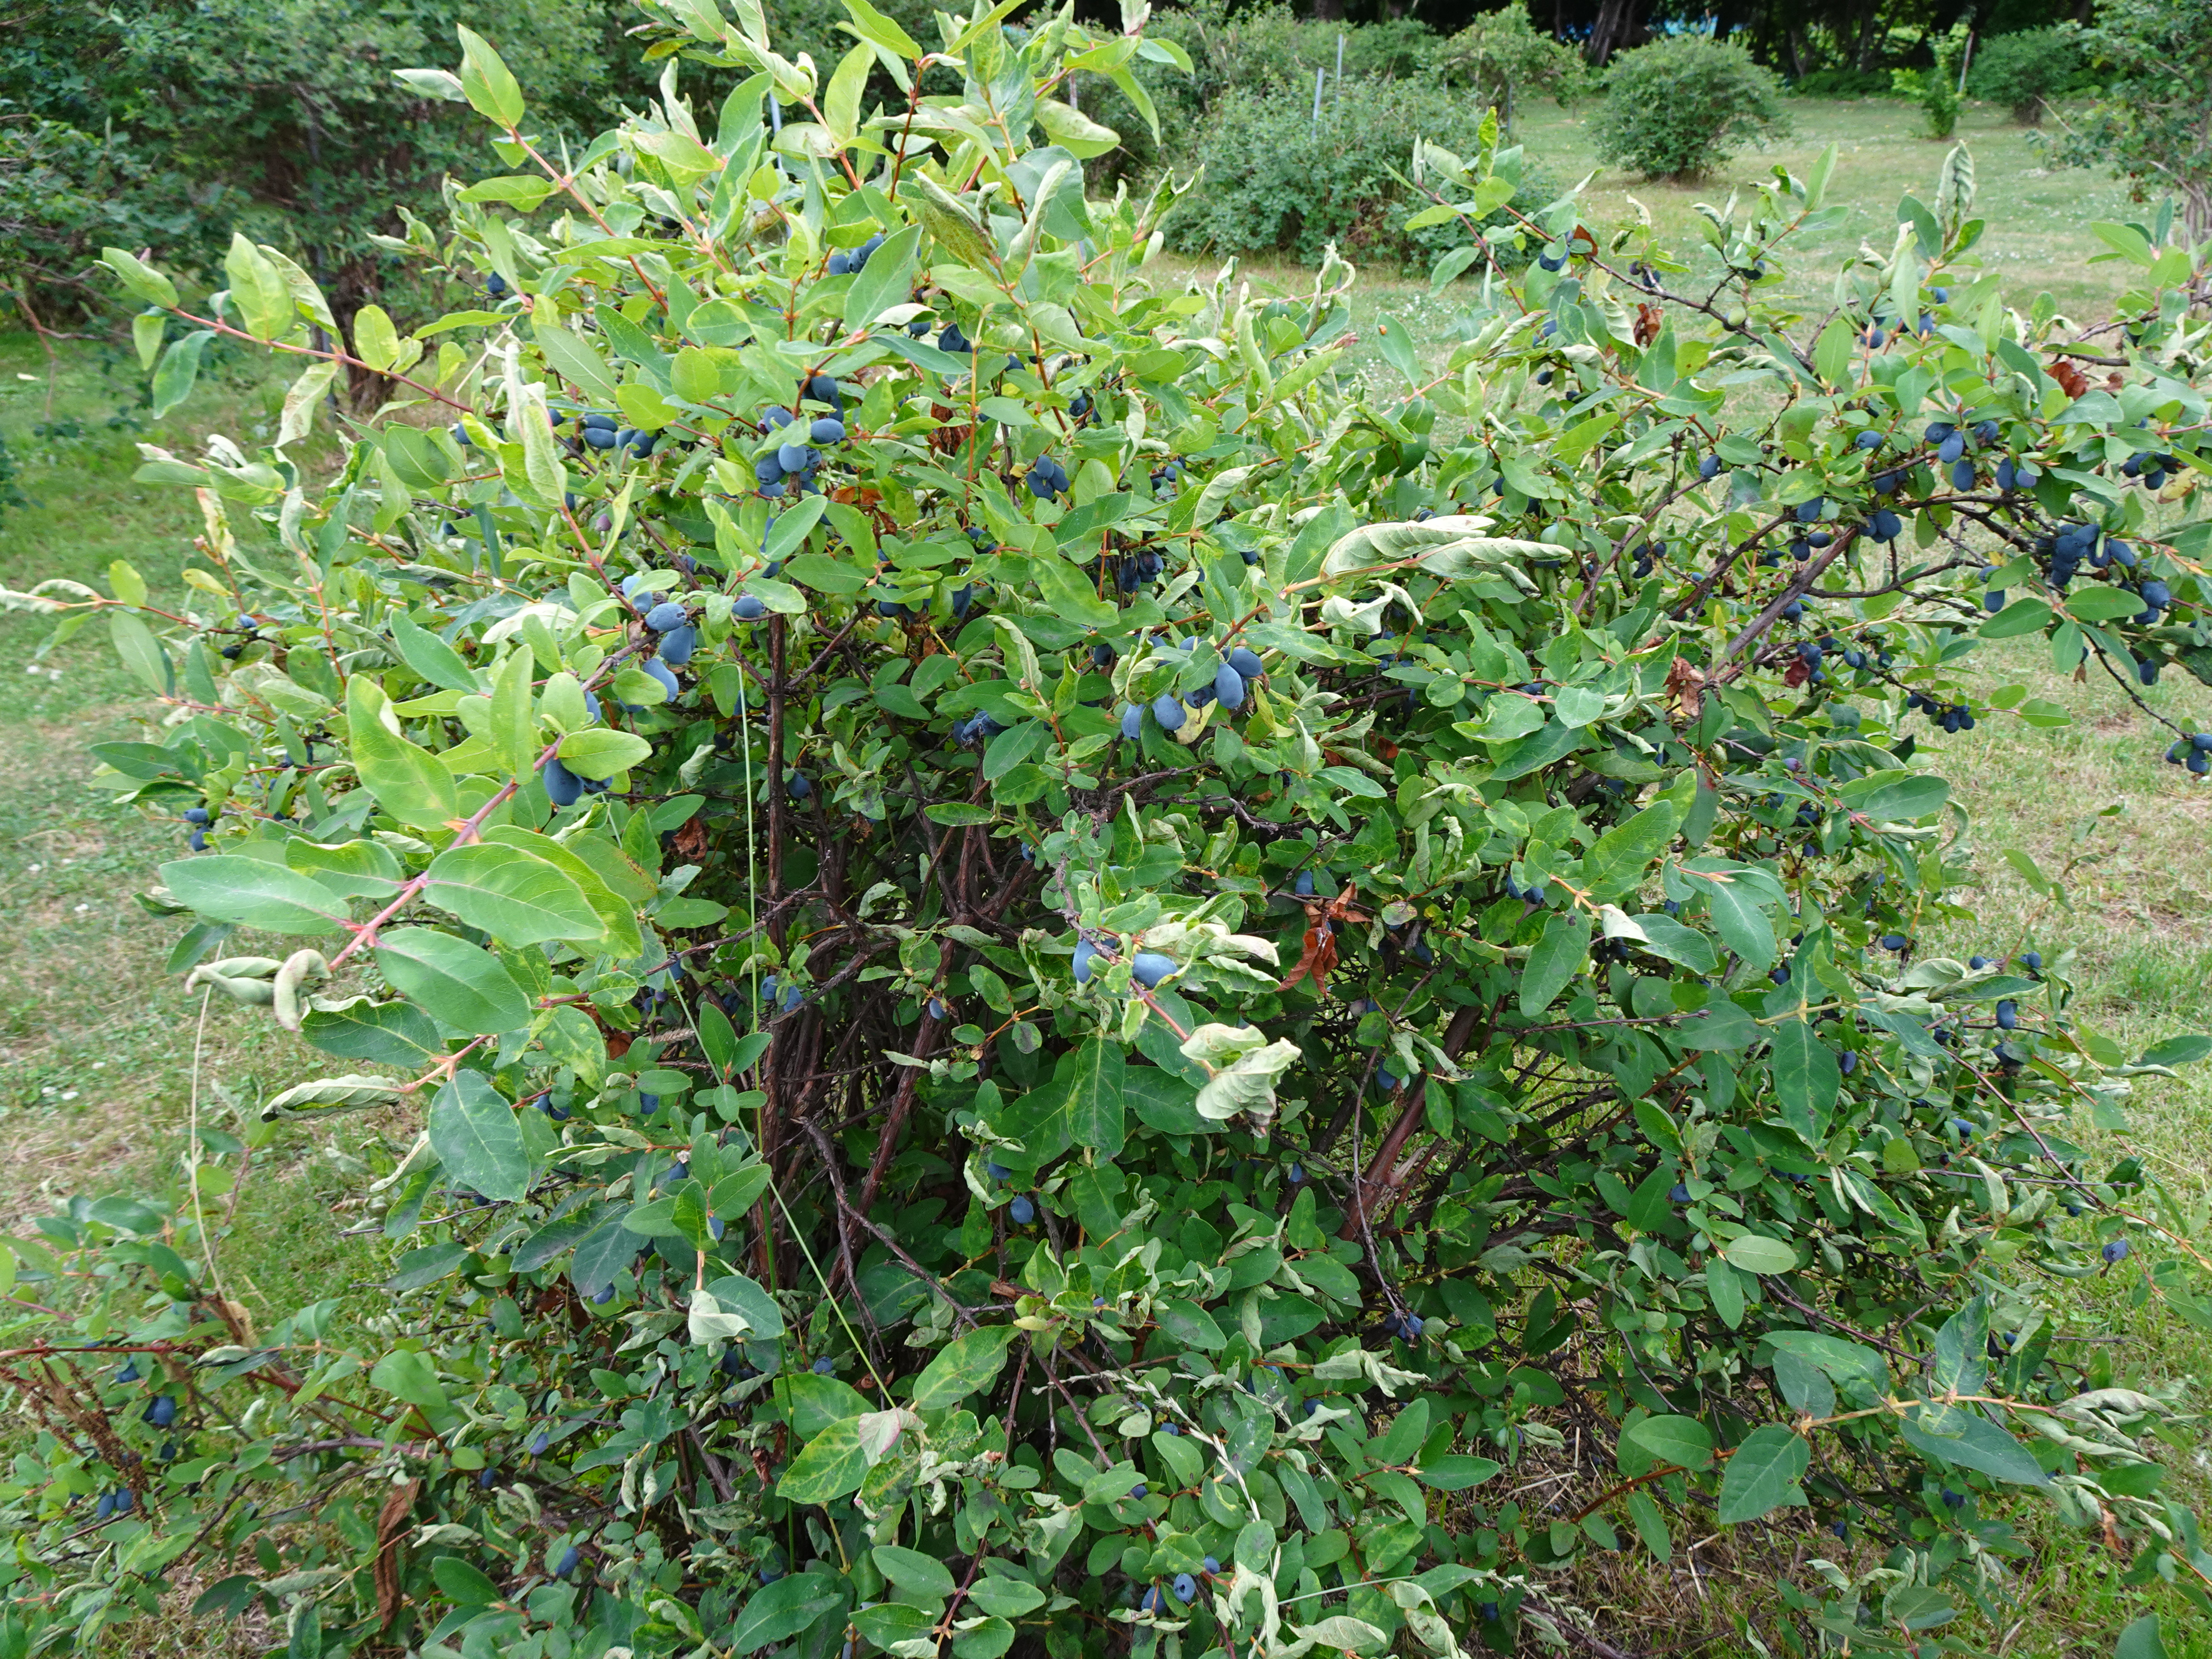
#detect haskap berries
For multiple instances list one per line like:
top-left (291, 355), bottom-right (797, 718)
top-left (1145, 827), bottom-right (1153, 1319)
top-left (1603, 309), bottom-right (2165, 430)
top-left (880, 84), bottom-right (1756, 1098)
top-left (1423, 636), bottom-right (1436, 644)
top-left (756, 453), bottom-right (786, 483)
top-left (1386, 653), bottom-right (1396, 660)
top-left (1539, 246), bottom-right (1570, 272)
top-left (2192, 733), bottom-right (2210, 749)
top-left (1606, 779), bottom-right (1625, 794)
top-left (916, 289), bottom-right (924, 302)
top-left (1691, 607), bottom-right (1707, 617)
top-left (1729, 306), bottom-right (1746, 324)
top-left (659, 318), bottom-right (663, 328)
top-left (2133, 418), bottom-right (2148, 429)
top-left (1798, 594), bottom-right (1814, 610)
top-left (1007, 356), bottom-right (1025, 372)
top-left (828, 398), bottom-right (846, 422)
top-left (1812, 671), bottom-right (1825, 680)
top-left (760, 517), bottom-right (777, 552)
top-left (2144, 468), bottom-right (2165, 490)
top-left (1524, 499), bottom-right (1538, 514)
top-left (708, 1217), bottom-right (724, 1239)
top-left (1181, 635), bottom-right (1202, 651)
top-left (2184, 645), bottom-right (2198, 654)
top-left (305, 744), bottom-right (314, 765)
top-left (1959, 714), bottom-right (1976, 730)
top-left (1366, 1000), bottom-right (1379, 1012)
top-left (1844, 648), bottom-right (1860, 667)
top-left (1548, 560), bottom-right (1560, 569)
top-left (1940, 1155), bottom-right (1949, 1165)
top-left (2055, 524), bottom-right (2079, 536)
top-left (660, 216), bottom-right (681, 228)
top-left (1384, 631), bottom-right (1396, 639)
top-left (621, 701), bottom-right (643, 714)
top-left (1942, 1490), bottom-right (1959, 1506)
top-left (1532, 336), bottom-right (1541, 346)
top-left (2089, 545), bottom-right (2108, 567)
top-left (722, 1350), bottom-right (739, 1375)
top-left (1094, 643), bottom-right (1116, 665)
top-left (1858, 519), bottom-right (1877, 536)
top-left (595, 514), bottom-right (611, 531)
top-left (799, 482), bottom-right (821, 497)
top-left (923, 993), bottom-right (953, 1022)
top-left (1855, 430), bottom-right (1883, 449)
top-left (1062, 360), bottom-right (1077, 370)
top-left (549, 1106), bottom-right (570, 1121)
top-left (1995, 1001), bottom-right (2016, 1029)
top-left (1400, 660), bottom-right (1413, 668)
top-left (1419, 511), bottom-right (1435, 522)
top-left (1409, 1312), bottom-right (1426, 1334)
top-left (1973, 415), bottom-right (2003, 441)
top-left (483, 1468), bottom-right (494, 1488)
top-left (1507, 868), bottom-right (1533, 899)
top-left (2036, 535), bottom-right (2054, 555)
top-left (976, 413), bottom-right (989, 422)
top-left (1798, 811), bottom-right (1819, 826)
top-left (1953, 462), bottom-right (1973, 491)
top-left (1543, 319), bottom-right (1557, 337)
top-left (1651, 744), bottom-right (1663, 767)
top-left (193, 827), bottom-right (210, 851)
top-left (1142, 551), bottom-right (1163, 574)
top-left (1835, 1291), bottom-right (1845, 1307)
top-left (1410, 689), bottom-right (1417, 700)
top-left (788, 773), bottom-right (810, 801)
top-left (1943, 712), bottom-right (1959, 731)
top-left (1391, 608), bottom-right (1405, 618)
top-left (761, 1572), bottom-right (783, 1582)
top-left (2156, 453), bottom-right (2179, 474)
top-left (1952, 1038), bottom-right (1969, 1047)
top-left (943, 332), bottom-right (962, 353)
top-left (1264, 1364), bottom-right (1281, 1378)
top-left (643, 658), bottom-right (678, 700)
top-left (444, 522), bottom-right (457, 536)
top-left (880, 602), bottom-right (901, 617)
top-left (1939, 431), bottom-right (1964, 464)
top-left (255, 781), bottom-right (261, 788)
top-left (1996, 457), bottom-right (2013, 491)
top-left (617, 531), bottom-right (629, 539)
top-left (1353, 1486), bottom-right (1366, 1500)
top-left (2055, 538), bottom-right (2087, 560)
top-left (1197, 569), bottom-right (1205, 582)
top-left (1632, 556), bottom-right (1653, 579)
top-left (96, 1495), bottom-right (114, 1517)
top-left (1877, 652), bottom-right (1891, 667)
top-left (660, 624), bottom-right (697, 662)
top-left (1788, 1174), bottom-right (1803, 1182)
top-left (1912, 314), bottom-right (1932, 341)
top-left (1987, 1341), bottom-right (2002, 1361)
top-left (1632, 545), bottom-right (1651, 560)
top-left (554, 1547), bottom-right (577, 1574)
top-left (682, 555), bottom-right (701, 574)
top-left (641, 603), bottom-right (687, 633)
top-left (1185, 688), bottom-right (1211, 708)
top-left (1922, 701), bottom-right (1937, 716)
top-left (532, 1095), bottom-right (549, 1111)
top-left (2121, 452), bottom-right (2149, 478)
top-left (1291, 1163), bottom-right (1302, 1183)
top-left (1797, 640), bottom-right (1810, 652)
top-left (819, 513), bottom-right (834, 527)
top-left (758, 419), bottom-right (768, 435)
top-left (1119, 568), bottom-right (1140, 592)
top-left (949, 582), bottom-right (970, 618)
top-left (1303, 1399), bottom-right (1323, 1414)
top-left (224, 644), bottom-right (243, 661)
top-left (1524, 683), bottom-right (1542, 694)
top-left (2016, 469), bottom-right (2036, 487)
top-left (1821, 637), bottom-right (1838, 649)
top-left (1822, 501), bottom-right (1840, 520)
top-left (1925, 419), bottom-right (1953, 443)
top-left (681, 340), bottom-right (686, 345)
top-left (1415, 940), bottom-right (1433, 960)
top-left (1783, 601), bottom-right (1799, 620)
top-left (1595, 954), bottom-right (1607, 964)
top-left (1772, 1169), bottom-right (1789, 1178)
top-left (2103, 1243), bottom-right (2115, 1261)
top-left (1692, 573), bottom-right (1703, 581)
top-left (1029, 357), bottom-right (1042, 365)
top-left (1396, 1324), bottom-right (1408, 1341)
top-left (584, 776), bottom-right (614, 792)
top-left (1389, 925), bottom-right (1401, 929)
top-left (1142, 1585), bottom-right (1165, 1616)
top-left (762, 562), bottom-right (780, 578)
top-left (762, 975), bottom-right (778, 1001)
top-left (938, 324), bottom-right (953, 351)
top-left (2167, 738), bottom-right (2192, 764)
top-left (2110, 538), bottom-right (2137, 566)
top-left (186, 808), bottom-right (210, 822)
top-left (1783, 758), bottom-right (1802, 771)
top-left (1873, 874), bottom-right (1885, 886)
top-left (1378, 661), bottom-right (1389, 670)
top-left (1893, 318), bottom-right (1910, 332)
top-left (580, 686), bottom-right (602, 722)
top-left (85, 1340), bottom-right (103, 1348)
top-left (2074, 524), bottom-right (2101, 546)
top-left (1984, 589), bottom-right (2005, 613)
top-left (1654, 543), bottom-right (1667, 557)
top-left (669, 960), bottom-right (684, 980)
top-left (640, 1089), bottom-right (658, 1115)
top-left (959, 715), bottom-right (991, 744)
top-left (1204, 1558), bottom-right (1219, 1572)
top-left (1240, 552), bottom-right (1258, 563)
top-left (1535, 505), bottom-right (1550, 518)
top-left (1494, 477), bottom-right (1506, 495)
top-left (1802, 844), bottom-right (1814, 857)
top-left (1614, 937), bottom-right (1628, 955)
top-left (617, 428), bottom-right (634, 448)
top-left (680, 441), bottom-right (694, 452)
top-left (812, 1356), bottom-right (834, 1374)
top-left (566, 437), bottom-right (585, 455)
top-left (733, 597), bottom-right (763, 617)
top-left (160, 1439), bottom-right (175, 1462)
top-left (765, 405), bottom-right (792, 434)
top-left (1070, 945), bottom-right (1101, 987)
top-left (1723, 316), bottom-right (1745, 332)
top-left (785, 988), bottom-right (805, 1012)
top-left (760, 482), bottom-right (785, 498)
top-left (1834, 1521), bottom-right (1846, 1536)
top-left (1859, 901), bottom-right (1871, 912)
top-left (1150, 479), bottom-right (1161, 489)
top-left (270, 779), bottom-right (278, 789)
top-left (1860, 315), bottom-right (1889, 329)
top-left (2067, 1205), bottom-right (2080, 1217)
top-left (1522, 884), bottom-right (1547, 910)
top-left (2111, 1241), bottom-right (2126, 1260)
top-left (1579, 564), bottom-right (1594, 577)
top-left (988, 1165), bottom-right (1012, 1178)
top-left (842, 463), bottom-right (858, 475)
top-left (1049, 466), bottom-right (1069, 493)
top-left (546, 755), bottom-right (584, 808)
top-left (2129, 647), bottom-right (2148, 664)
top-left (813, 375), bottom-right (836, 400)
top-left (275, 813), bottom-right (283, 820)
top-left (1961, 410), bottom-right (1977, 427)
top-left (1401, 1074), bottom-right (1410, 1088)
top-left (1375, 1066), bottom-right (1394, 1089)
top-left (1804, 645), bottom-right (1822, 675)
top-left (1806, 534), bottom-right (1831, 548)
top-left (1665, 900), bottom-right (1679, 917)
top-left (1011, 1197), bottom-right (1033, 1225)
top-left (1872, 533), bottom-right (1887, 544)
top-left (1757, 558), bottom-right (1780, 569)
top-left (734, 692), bottom-right (747, 715)
top-left (582, 415), bottom-right (618, 430)
top-left (2141, 659), bottom-right (2161, 686)
top-left (1566, 390), bottom-right (1580, 399)
top-left (1132, 950), bottom-right (1180, 989)
top-left (910, 322), bottom-right (930, 336)
top-left (1668, 1184), bottom-right (1692, 1201)
top-left (1882, 935), bottom-right (1905, 950)
top-left (858, 235), bottom-right (884, 262)
top-left (842, 1641), bottom-right (853, 1658)
top-left (1247, 1377), bottom-right (1255, 1394)
top-left (1876, 509), bottom-right (1901, 535)
top-left (811, 419), bottom-right (846, 443)
top-left (1934, 1028), bottom-right (1952, 1042)
top-left (156, 1395), bottom-right (176, 1425)
top-left (737, 1370), bottom-right (756, 1379)
top-left (1166, 460), bottom-right (1183, 481)
top-left (1925, 287), bottom-right (1948, 302)
top-left (1937, 713), bottom-right (1948, 725)
top-left (548, 409), bottom-right (564, 424)
top-left (455, 509), bottom-right (470, 519)
top-left (2027, 951), bottom-right (2042, 966)
top-left (1743, 260), bottom-right (1766, 279)
top-left (240, 615), bottom-right (257, 629)
top-left (631, 429), bottom-right (656, 459)
top-left (1951, 1119), bottom-right (1972, 1137)
top-left (669, 1162), bottom-right (689, 1179)
top-left (1124, 555), bottom-right (1137, 572)
top-left (1842, 1051), bottom-right (1856, 1075)
top-left (2185, 749), bottom-right (2210, 776)
top-left (1213, 663), bottom-right (1244, 710)
top-left (1160, 1422), bottom-right (1178, 1435)
top-left (641, 1246), bottom-right (656, 1257)
top-left (1122, 702), bottom-right (1147, 740)
top-left (1295, 870), bottom-right (1313, 897)
top-left (848, 247), bottom-right (868, 273)
top-left (1533, 561), bottom-right (1547, 568)
top-left (569, 1174), bottom-right (579, 1182)
top-left (2053, 567), bottom-right (2075, 587)
top-left (142, 1395), bottom-right (159, 1421)
top-left (1874, 473), bottom-right (1896, 494)
top-left (1699, 452), bottom-right (1721, 478)
top-left (1779, 456), bottom-right (1789, 468)
top-left (1772, 967), bottom-right (1792, 986)
top-left (1969, 955), bottom-right (1984, 968)
top-left (1138, 569), bottom-right (1156, 583)
top-left (1906, 693), bottom-right (1922, 708)
top-left (722, 994), bottom-right (739, 1011)
top-left (2080, 648), bottom-right (2090, 662)
top-left (1540, 524), bottom-right (1558, 543)
top-left (714, 728), bottom-right (736, 751)
top-left (622, 577), bottom-right (651, 612)
top-left (530, 1433), bottom-right (549, 1455)
top-left (1021, 842), bottom-right (1035, 861)
top-left (1135, 633), bottom-right (1171, 664)
top-left (584, 428), bottom-right (615, 449)
top-left (800, 469), bottom-right (819, 482)
top-left (770, 308), bottom-right (783, 313)
top-left (1226, 646), bottom-right (1263, 676)
top-left (456, 425), bottom-right (469, 443)
top-left (1991, 1046), bottom-right (2010, 1063)
top-left (2134, 609), bottom-right (2160, 626)
top-left (286, 752), bottom-right (295, 765)
top-left (1538, 371), bottom-right (1553, 385)
top-left (1674, 611), bottom-right (1687, 621)
top-left (1630, 260), bottom-right (1642, 274)
top-left (506, 534), bottom-right (514, 545)
top-left (1173, 1572), bottom-right (1195, 1602)
top-left (969, 529), bottom-right (997, 553)
top-left (1035, 454), bottom-right (1053, 479)
top-left (805, 445), bottom-right (820, 467)
top-left (473, 1195), bottom-right (490, 1206)
top-left (1953, 705), bottom-right (1971, 713)
top-left (829, 255), bottom-right (848, 274)
top-left (656, 989), bottom-right (668, 1002)
top-left (1093, 558), bottom-right (1104, 570)
top-left (2080, 1381), bottom-right (2090, 1393)
top-left (594, 1283), bottom-right (614, 1305)
top-left (1859, 328), bottom-right (1884, 348)
top-left (2004, 1334), bottom-right (2016, 1345)
top-left (877, 550), bottom-right (888, 561)
top-left (1025, 472), bottom-right (1055, 503)
top-left (113, 1490), bottom-right (133, 1510)
top-left (797, 380), bottom-right (813, 399)
top-left (1515, 1427), bottom-right (1523, 1444)
top-left (1791, 933), bottom-right (1803, 946)
top-left (1979, 565), bottom-right (2003, 582)
top-left (499, 1244), bottom-right (512, 1255)
top-left (1856, 631), bottom-right (1868, 642)
top-left (1132, 1484), bottom-right (1151, 1498)
top-left (1497, 1427), bottom-right (1508, 1447)
top-left (1855, 652), bottom-right (1868, 671)
top-left (1385, 1312), bottom-right (1402, 1331)
top-left (1914, 1099), bottom-right (1927, 1108)
top-left (1643, 269), bottom-right (1661, 287)
top-left (487, 1325), bottom-right (496, 1333)
top-left (2142, 580), bottom-right (2170, 608)
top-left (1764, 550), bottom-right (1785, 557)
top-left (1691, 1230), bottom-right (1710, 1251)
top-left (1093, 1297), bottom-right (1104, 1306)
top-left (1092, 408), bottom-right (1100, 423)
top-left (486, 271), bottom-right (506, 294)
top-left (1151, 694), bottom-right (1187, 731)
top-left (960, 340), bottom-right (972, 351)
top-left (117, 1363), bottom-right (140, 1381)
top-left (1484, 1603), bottom-right (1497, 1620)
top-left (1796, 497), bottom-right (1823, 521)
top-left (645, 997), bottom-right (655, 1011)
top-left (1793, 543), bottom-right (1809, 561)
top-left (564, 492), bottom-right (576, 511)
top-left (728, 1401), bottom-right (741, 1407)
top-left (1070, 391), bottom-right (1086, 415)
top-left (661, 830), bottom-right (678, 843)
top-left (779, 442), bottom-right (808, 473)
top-left (750, 631), bottom-right (758, 647)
